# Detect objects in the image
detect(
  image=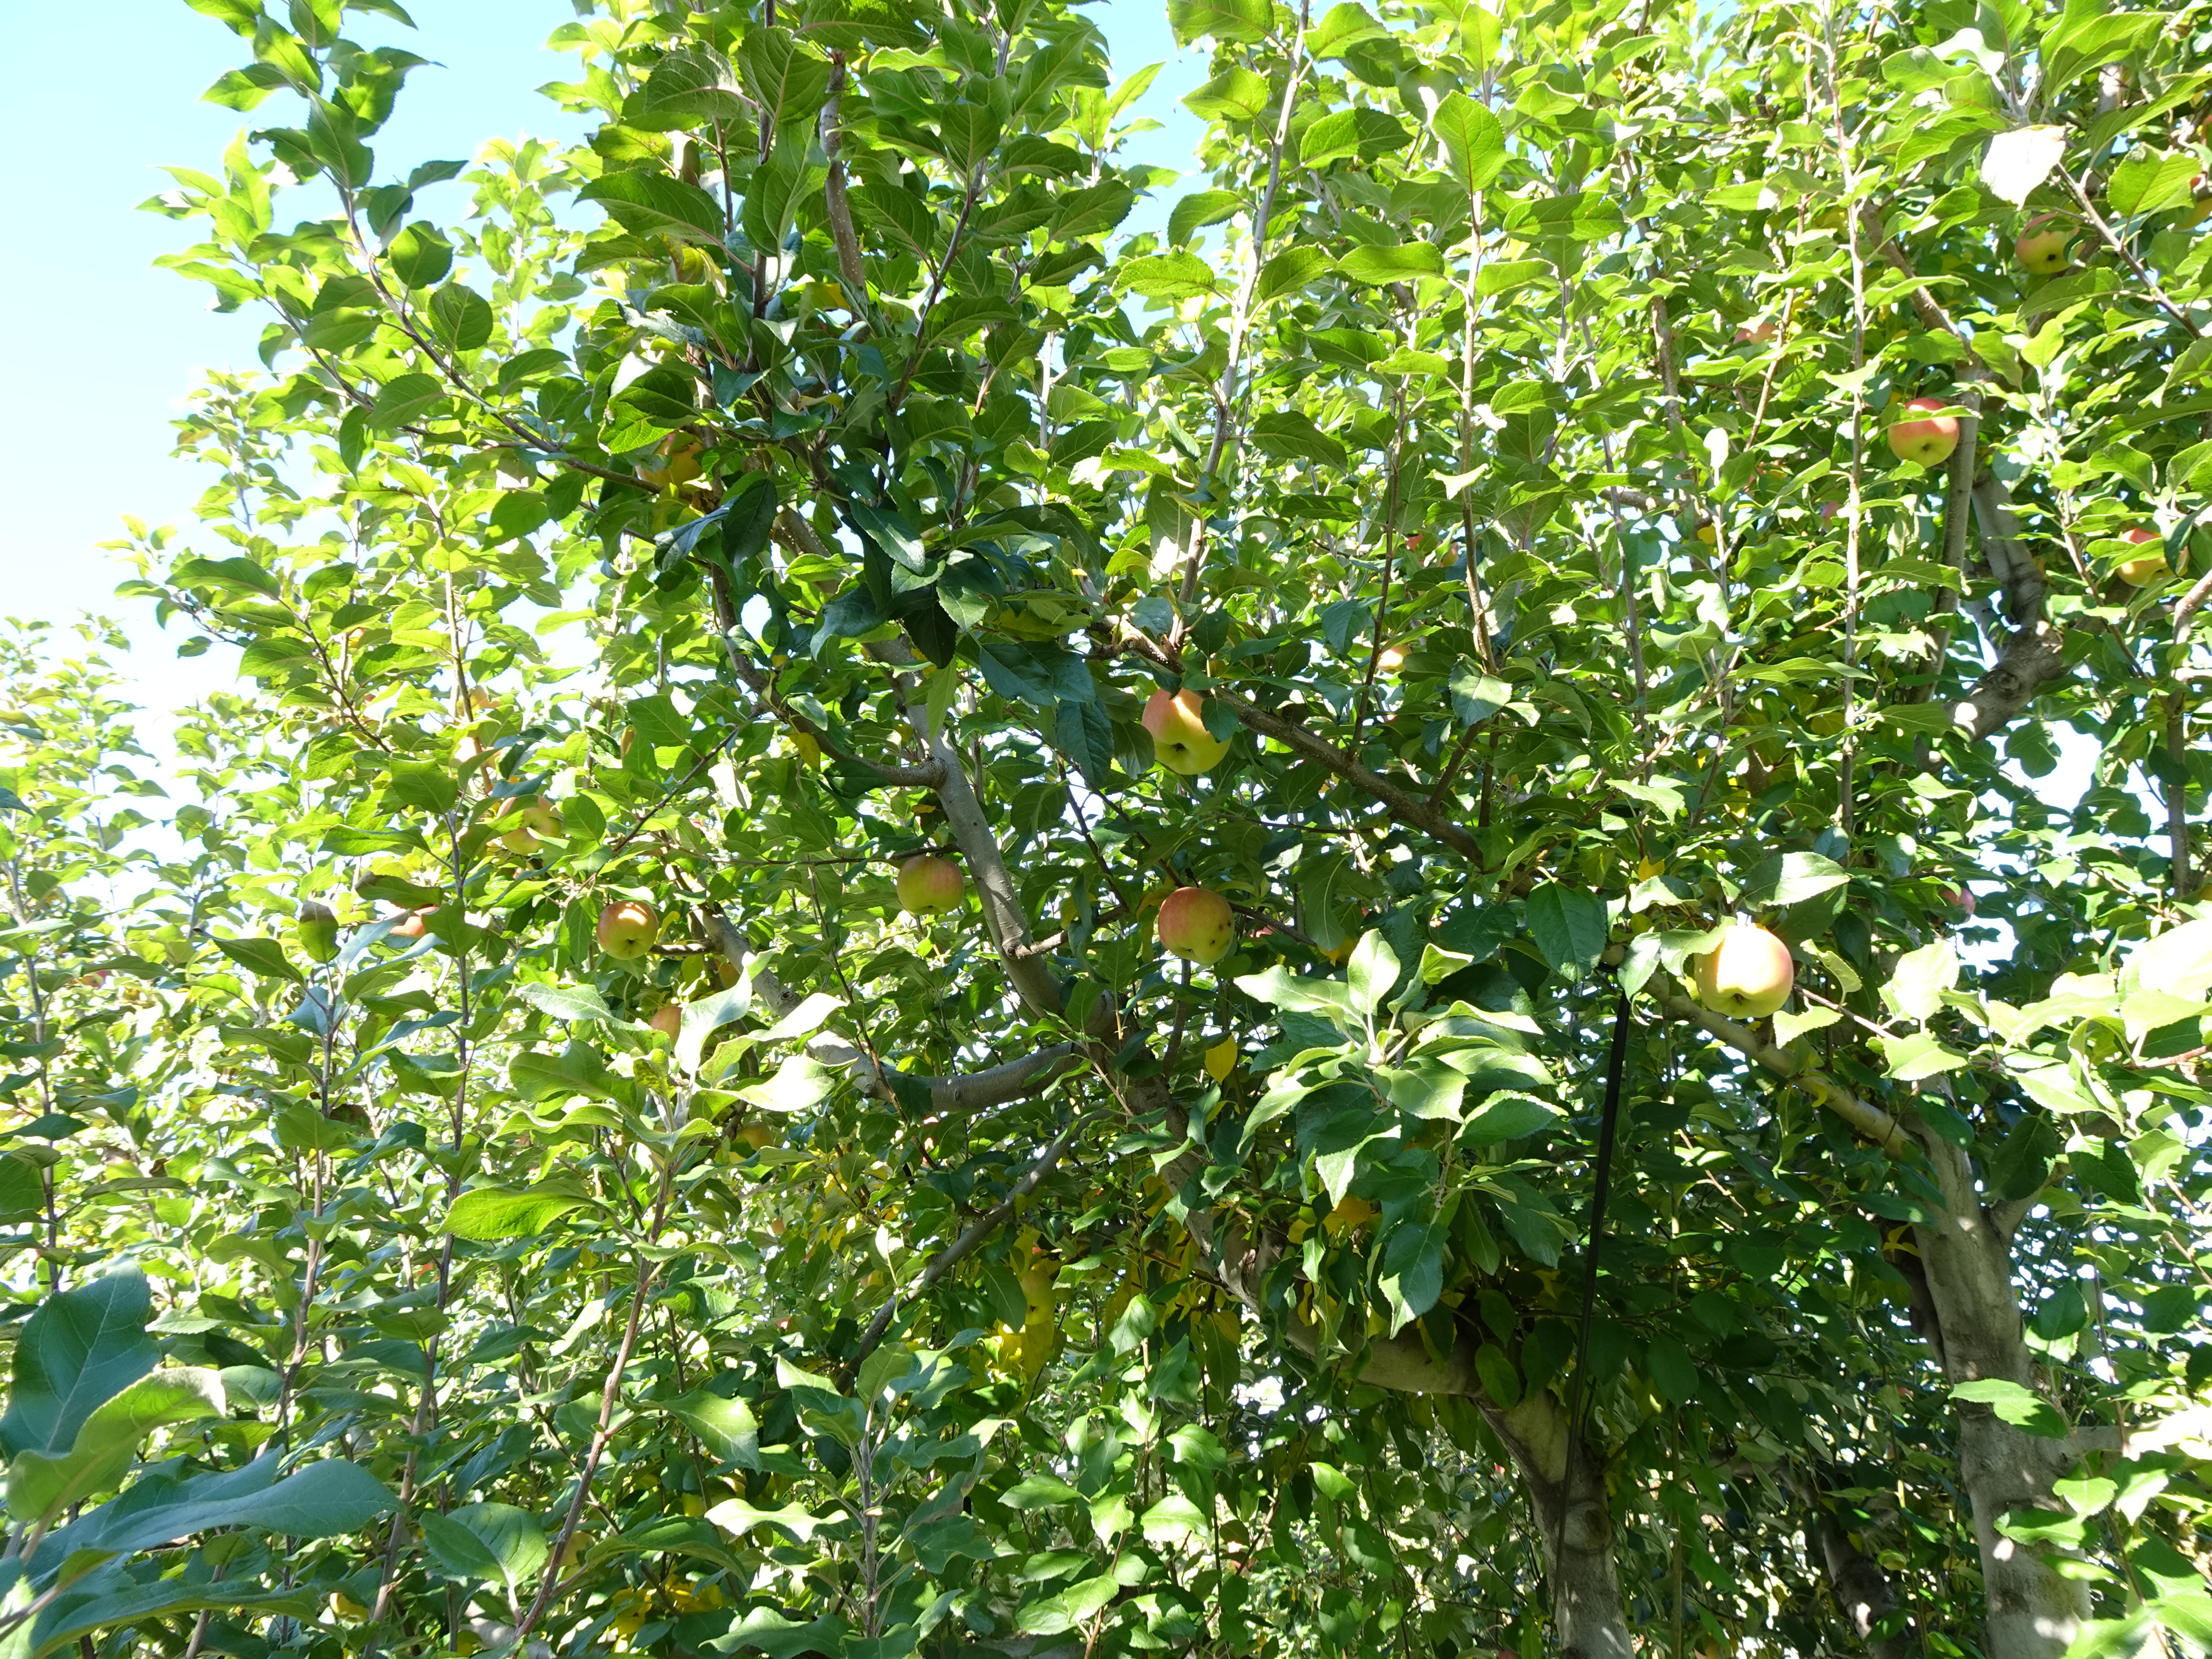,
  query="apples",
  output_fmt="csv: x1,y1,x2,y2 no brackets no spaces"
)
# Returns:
1233,1545,1255,1569
896,854,963,919
1817,497,1862,541
1888,396,1960,470
1353,905,1370,924
1247,919,1280,955
863,1163,890,1191
775,1319,797,1338
1384,711,1403,729
1731,318,1792,380
814,280,853,322
330,1580,381,1623
860,1257,892,1292
1021,1245,1048,1272
1141,677,1234,777
2170,17,2195,43
1742,460,1792,506
1103,584,1133,622
2187,173,2203,191
771,1215,797,1239
2201,110,2212,151
1490,1459,1511,1478
619,724,668,767
1406,525,1463,573
1690,1617,1739,1659
1315,1183,1383,1251
1476,1623,1535,1659
682,1475,756,1536
634,411,713,488
2157,170,2210,236
1451,1530,1471,1550
803,1251,826,1271
28,1238,72,1270
1370,632,1414,674
1090,1186,1106,1202
2111,521,2189,590
719,954,749,988
914,1116,950,1167
1939,883,1977,924
549,1531,597,1575
1692,511,1727,543
731,1117,775,1177
504,771,522,787
596,900,656,961
996,1315,1053,1379
345,624,374,656
496,793,563,859
820,1173,863,1219
1897,1383,1916,1402
607,1584,660,1637
455,681,503,725
684,817,704,838
512,1129,551,1171
883,1205,912,1230
488,742,516,773
1312,767,1341,793
408,1256,440,1285
1158,886,1236,964
1813,207,1859,252
365,695,375,708
1497,759,1526,788
2016,207,2090,276
67,962,106,993
1009,1268,1060,1327
454,815,502,860
668,1571,724,1620
1880,399,1907,429
1691,922,1795,1020
1166,1250,1215,1307
383,888,444,939
337,704,373,731
629,1000,682,1051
